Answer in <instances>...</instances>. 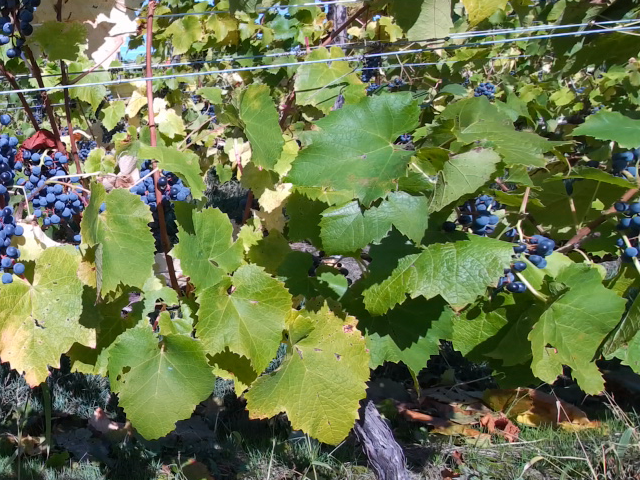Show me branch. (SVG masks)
Returning a JSON list of instances; mask_svg holds the SVG:
<instances>
[{
	"instance_id": "15",
	"label": "branch",
	"mask_w": 640,
	"mask_h": 480,
	"mask_svg": "<svg viewBox=\"0 0 640 480\" xmlns=\"http://www.w3.org/2000/svg\"><path fill=\"white\" fill-rule=\"evenodd\" d=\"M60 68H61V72L63 73L62 83L64 85L69 84L70 83V79H69V70H68L67 63L65 61H62L60 63Z\"/></svg>"
},
{
	"instance_id": "2",
	"label": "branch",
	"mask_w": 640,
	"mask_h": 480,
	"mask_svg": "<svg viewBox=\"0 0 640 480\" xmlns=\"http://www.w3.org/2000/svg\"><path fill=\"white\" fill-rule=\"evenodd\" d=\"M64 103H65V107H64L65 122L67 124V129H68V133H69V136H70V147H71L72 153H73L74 163H75V167H76V173L77 174H81L82 173L81 164H80V160H79L77 146L75 144V134H74V131H73V126H72V114L69 113V110H70L69 89L68 90H64Z\"/></svg>"
},
{
	"instance_id": "14",
	"label": "branch",
	"mask_w": 640,
	"mask_h": 480,
	"mask_svg": "<svg viewBox=\"0 0 640 480\" xmlns=\"http://www.w3.org/2000/svg\"><path fill=\"white\" fill-rule=\"evenodd\" d=\"M522 213L537 226L538 230L543 234L544 237L546 238L551 237V234L546 231V229L542 226L540 221L537 218H535L533 215H531L527 209H523Z\"/></svg>"
},
{
	"instance_id": "5",
	"label": "branch",
	"mask_w": 640,
	"mask_h": 480,
	"mask_svg": "<svg viewBox=\"0 0 640 480\" xmlns=\"http://www.w3.org/2000/svg\"><path fill=\"white\" fill-rule=\"evenodd\" d=\"M155 4L151 3L149 6V13L146 19L147 25V36H146V68H145V76L152 75V67H151V55H152V23H153V15H154Z\"/></svg>"
},
{
	"instance_id": "8",
	"label": "branch",
	"mask_w": 640,
	"mask_h": 480,
	"mask_svg": "<svg viewBox=\"0 0 640 480\" xmlns=\"http://www.w3.org/2000/svg\"><path fill=\"white\" fill-rule=\"evenodd\" d=\"M26 50H27V53L29 55L30 64H31V67H32L33 74L35 75L36 81H37V83H38V85L40 87H44L45 84H44L42 78L40 77L39 63H38V60H37V58H36V56H35V54H34V52L32 50V47L30 45H27L26 46Z\"/></svg>"
},
{
	"instance_id": "3",
	"label": "branch",
	"mask_w": 640,
	"mask_h": 480,
	"mask_svg": "<svg viewBox=\"0 0 640 480\" xmlns=\"http://www.w3.org/2000/svg\"><path fill=\"white\" fill-rule=\"evenodd\" d=\"M41 101L47 111L48 121L50 123L51 131H52L53 142L55 143L57 148H59V151L61 153H64L66 151V146L63 144L62 140L60 139L58 123H57V120L55 119L54 109L48 98L47 91L41 92Z\"/></svg>"
},
{
	"instance_id": "6",
	"label": "branch",
	"mask_w": 640,
	"mask_h": 480,
	"mask_svg": "<svg viewBox=\"0 0 640 480\" xmlns=\"http://www.w3.org/2000/svg\"><path fill=\"white\" fill-rule=\"evenodd\" d=\"M147 95L149 104L150 146L155 147L157 141L156 127L154 124V101L152 93V81H147Z\"/></svg>"
},
{
	"instance_id": "16",
	"label": "branch",
	"mask_w": 640,
	"mask_h": 480,
	"mask_svg": "<svg viewBox=\"0 0 640 480\" xmlns=\"http://www.w3.org/2000/svg\"><path fill=\"white\" fill-rule=\"evenodd\" d=\"M11 16H12V19L14 20V24L17 26V29H18V31H19V33H20V36H21V37H23V35H22V33H21V30H20V28H19L20 20H19V18H18V16H17V13H16V11H15V10H12V11H11Z\"/></svg>"
},
{
	"instance_id": "4",
	"label": "branch",
	"mask_w": 640,
	"mask_h": 480,
	"mask_svg": "<svg viewBox=\"0 0 640 480\" xmlns=\"http://www.w3.org/2000/svg\"><path fill=\"white\" fill-rule=\"evenodd\" d=\"M616 214V209L614 207H609L603 214H601L595 221L590 224H587L585 227L580 229L574 237L568 242L570 247H574L578 241L590 231H593L598 227V225L602 224L606 221L610 216H614Z\"/></svg>"
},
{
	"instance_id": "12",
	"label": "branch",
	"mask_w": 640,
	"mask_h": 480,
	"mask_svg": "<svg viewBox=\"0 0 640 480\" xmlns=\"http://www.w3.org/2000/svg\"><path fill=\"white\" fill-rule=\"evenodd\" d=\"M295 99H296V93L295 92H291L290 95H289V98L287 99L288 103L285 106V108H284V110L282 112L280 121H279V125L280 126H283L285 124L286 117H287V115H288V113H289V111H290Z\"/></svg>"
},
{
	"instance_id": "1",
	"label": "branch",
	"mask_w": 640,
	"mask_h": 480,
	"mask_svg": "<svg viewBox=\"0 0 640 480\" xmlns=\"http://www.w3.org/2000/svg\"><path fill=\"white\" fill-rule=\"evenodd\" d=\"M152 171H153V189L156 192L157 198V214L160 217V226H161V235L164 241V250L166 252L170 251V241L166 232V220H165V208L162 207V197H161V189L158 186V177L160 176V171L157 169V161H152Z\"/></svg>"
},
{
	"instance_id": "9",
	"label": "branch",
	"mask_w": 640,
	"mask_h": 480,
	"mask_svg": "<svg viewBox=\"0 0 640 480\" xmlns=\"http://www.w3.org/2000/svg\"><path fill=\"white\" fill-rule=\"evenodd\" d=\"M18 98H19V101L21 102V104L23 105V108H24V110H25V113L27 114V116H28V118H29V121H30V123H31L32 127H33L35 130H38V129H39V125H38V124H37V122L35 121V118H34V116H33V113L31 112V110H30V108H29V105H28L27 101L25 100V98H24L23 94H22V93H19V94H18Z\"/></svg>"
},
{
	"instance_id": "13",
	"label": "branch",
	"mask_w": 640,
	"mask_h": 480,
	"mask_svg": "<svg viewBox=\"0 0 640 480\" xmlns=\"http://www.w3.org/2000/svg\"><path fill=\"white\" fill-rule=\"evenodd\" d=\"M253 199H254V195L252 193H249L245 198L243 209H242V217H241V220L243 222H247L249 220L250 206Z\"/></svg>"
},
{
	"instance_id": "10",
	"label": "branch",
	"mask_w": 640,
	"mask_h": 480,
	"mask_svg": "<svg viewBox=\"0 0 640 480\" xmlns=\"http://www.w3.org/2000/svg\"><path fill=\"white\" fill-rule=\"evenodd\" d=\"M0 69L5 74L7 79L9 80V82H10V84H11L13 89L20 88V85L17 82V80L15 79V76L9 70V68L6 66L5 62L2 59H0Z\"/></svg>"
},
{
	"instance_id": "7",
	"label": "branch",
	"mask_w": 640,
	"mask_h": 480,
	"mask_svg": "<svg viewBox=\"0 0 640 480\" xmlns=\"http://www.w3.org/2000/svg\"><path fill=\"white\" fill-rule=\"evenodd\" d=\"M370 8V4L366 3L359 11H357L354 15H352L351 17H349L347 19V21L340 27L338 28L334 33H332L330 36L327 37V39L324 40L323 42V46L327 47L329 43L332 42V40H334L336 37H338L343 31H345L350 24L357 20L361 15H363L365 13V11H367Z\"/></svg>"
},
{
	"instance_id": "11",
	"label": "branch",
	"mask_w": 640,
	"mask_h": 480,
	"mask_svg": "<svg viewBox=\"0 0 640 480\" xmlns=\"http://www.w3.org/2000/svg\"><path fill=\"white\" fill-rule=\"evenodd\" d=\"M166 261H167V264H168L167 268H168L169 273H170L173 289H174L175 292H179L180 288H179L178 283H177V278H176V274H175V270H174V264L172 262V258H171L170 255L166 256Z\"/></svg>"
}]
</instances>
